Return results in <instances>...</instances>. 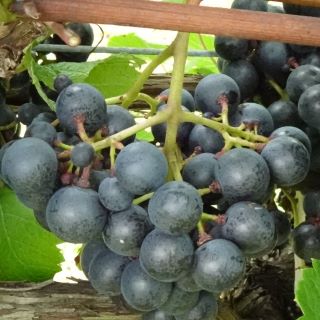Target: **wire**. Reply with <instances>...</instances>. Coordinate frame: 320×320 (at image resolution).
<instances>
[{"mask_svg": "<svg viewBox=\"0 0 320 320\" xmlns=\"http://www.w3.org/2000/svg\"><path fill=\"white\" fill-rule=\"evenodd\" d=\"M186 56L220 57L216 52L186 51Z\"/></svg>", "mask_w": 320, "mask_h": 320, "instance_id": "a73af890", "label": "wire"}, {"mask_svg": "<svg viewBox=\"0 0 320 320\" xmlns=\"http://www.w3.org/2000/svg\"><path fill=\"white\" fill-rule=\"evenodd\" d=\"M32 50L42 52H74V53H127L143 55H160L165 50H147L131 48H114V47H91L54 45V44H37Z\"/></svg>", "mask_w": 320, "mask_h": 320, "instance_id": "d2f4af69", "label": "wire"}]
</instances>
